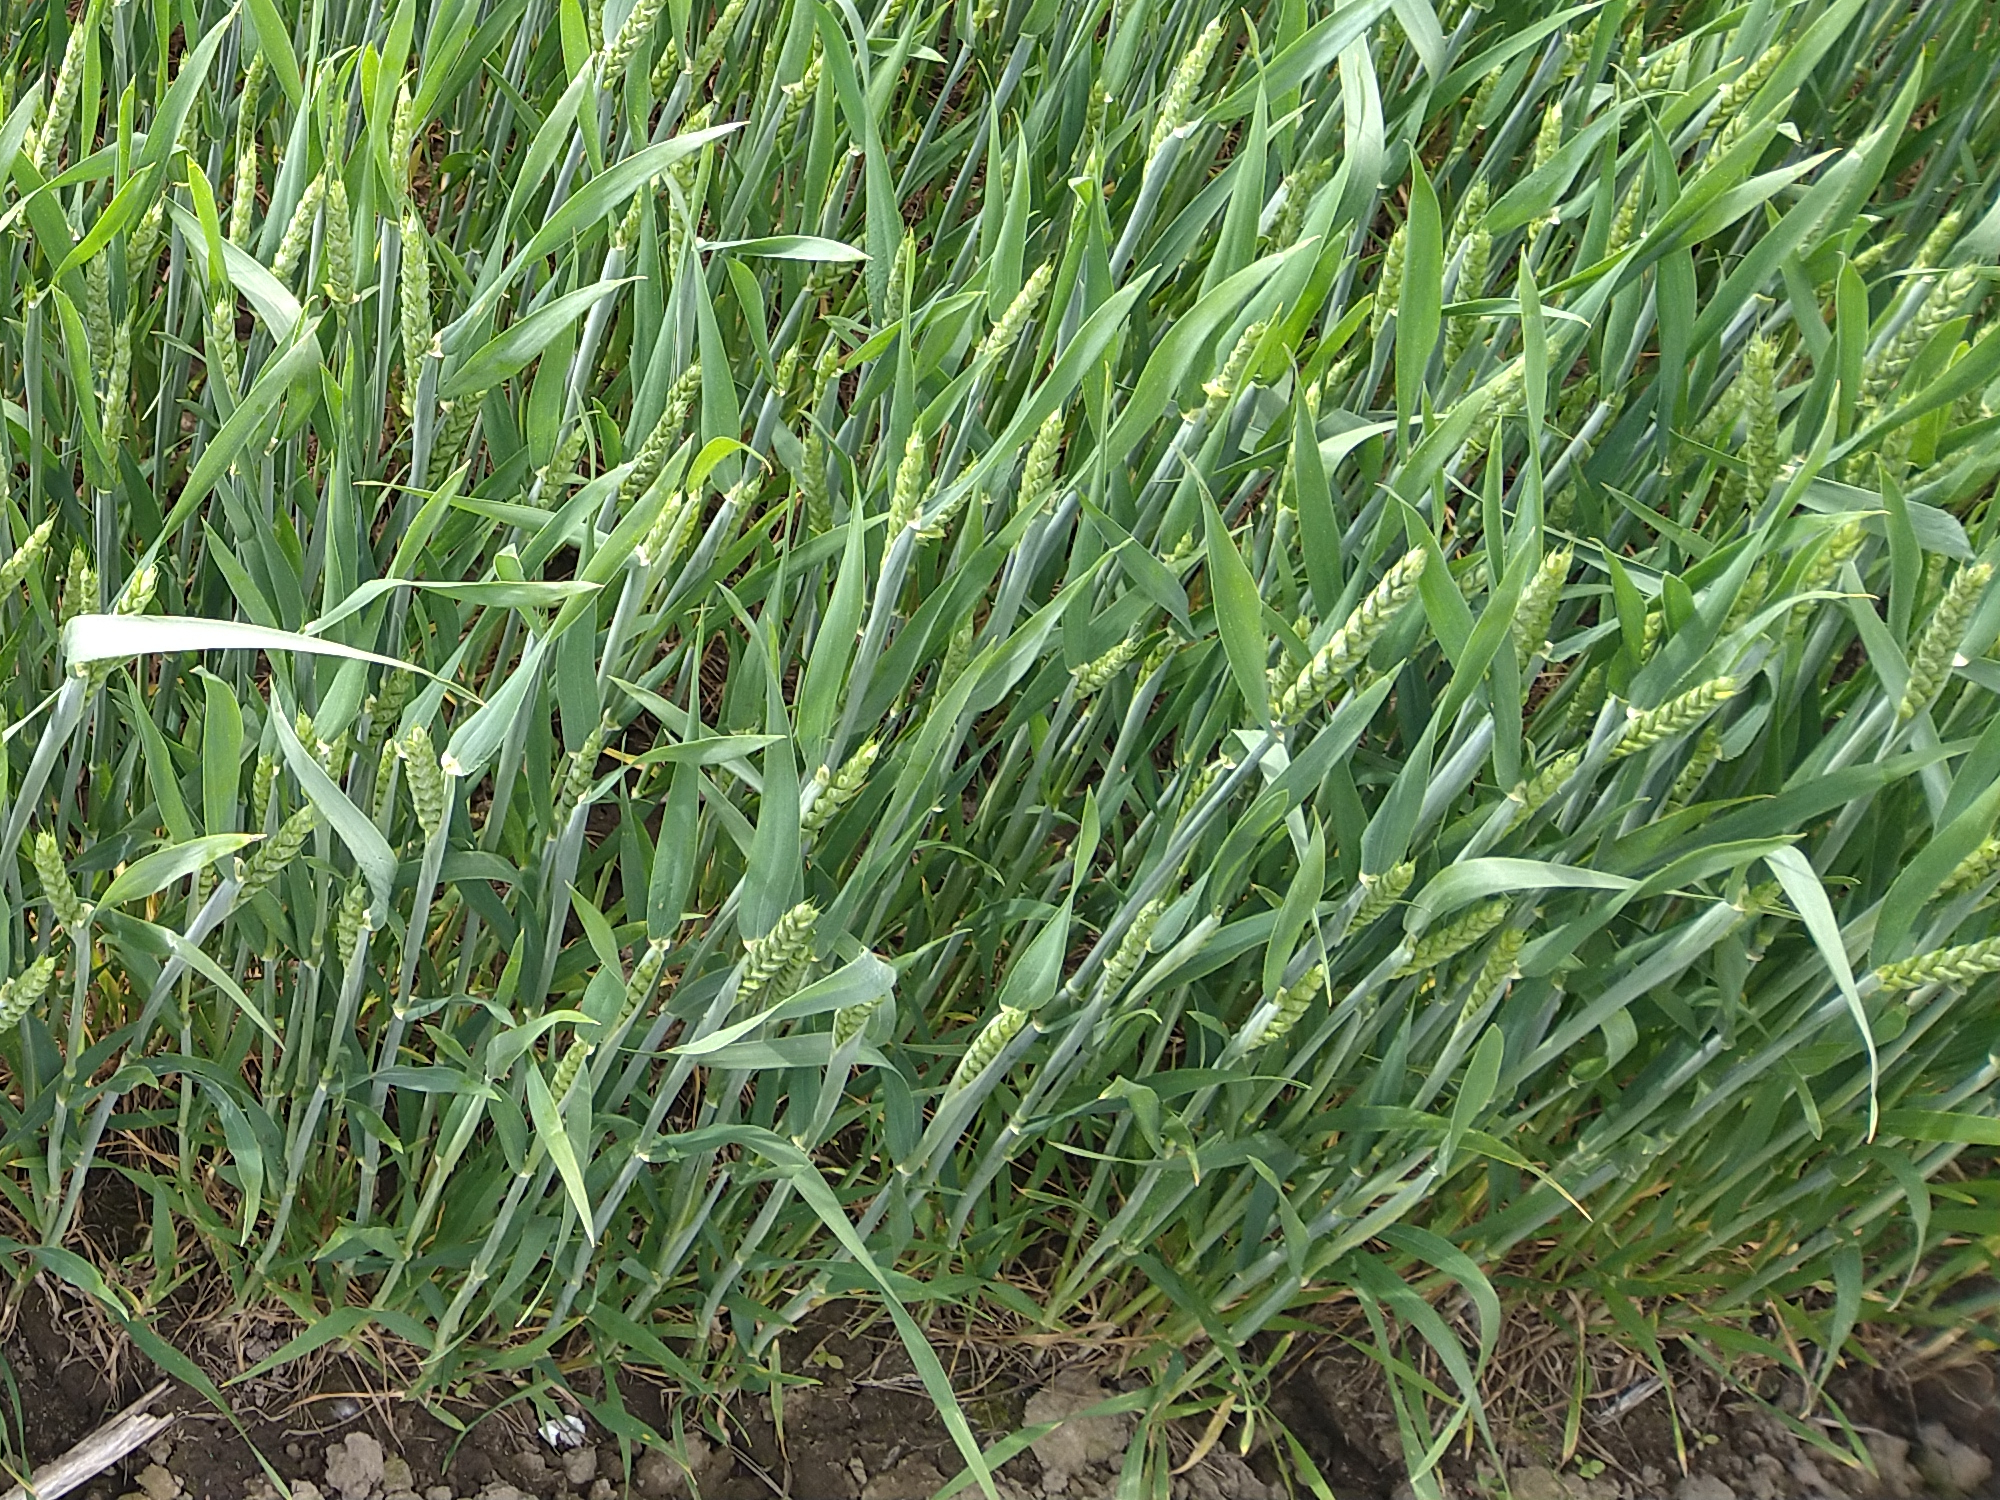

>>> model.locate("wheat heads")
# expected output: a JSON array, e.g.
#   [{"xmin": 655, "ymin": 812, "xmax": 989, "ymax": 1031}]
[
  {"xmin": 595, "ymin": 0, "xmax": 701, "ymax": 83},
  {"xmin": 234, "ymin": 804, "xmax": 312, "ymax": 911},
  {"xmin": 774, "ymin": 341, "xmax": 798, "ymax": 398},
  {"xmin": 338, "ymin": 866, "xmax": 372, "ymax": 955},
  {"xmin": 1701, "ymin": 111, "xmax": 1749, "ymax": 172},
  {"xmin": 1451, "ymin": 556, "xmax": 1491, "ymax": 606},
  {"xmin": 328, "ymin": 104, "xmax": 349, "ymax": 173},
  {"xmin": 701, "ymin": 0, "xmax": 746, "ymax": 78},
  {"xmin": 81, "ymin": 0, "xmax": 113, "ymax": 35},
  {"xmin": 613, "ymin": 407, "xmax": 682, "ymax": 511},
  {"xmin": 1104, "ymin": 900, "xmax": 1168, "ymax": 1001},
  {"xmin": 1449, "ymin": 229, "xmax": 1492, "ymax": 373},
  {"xmin": 949, "ymin": 1008, "xmax": 1027, "ymax": 1098},
  {"xmin": 715, "ymin": 476, "xmax": 760, "ymax": 567},
  {"xmin": 34, "ymin": 14, "xmax": 84, "ymax": 195},
  {"xmin": 768, "ymin": 949, "xmax": 809, "ymax": 1014},
  {"xmin": 1450, "ymin": 67, "xmax": 1500, "ymax": 165},
  {"xmin": 735, "ymin": 903, "xmax": 816, "ymax": 1006},
  {"xmin": 885, "ymin": 238, "xmax": 909, "ymax": 328},
  {"xmin": 670, "ymin": 192, "xmax": 684, "ymax": 286},
  {"xmin": 1286, "ymin": 377, "xmax": 1320, "ymax": 468},
  {"xmin": 253, "ymin": 759, "xmax": 270, "ymax": 834},
  {"xmin": 237, "ymin": 54, "xmax": 264, "ymax": 160},
  {"xmin": 584, "ymin": 0, "xmax": 607, "ymax": 61},
  {"xmin": 1180, "ymin": 764, "xmax": 1260, "ymax": 831},
  {"xmin": 1532, "ymin": 104, "xmax": 1562, "ymax": 231},
  {"xmin": 1325, "ymin": 351, "xmax": 1351, "ymax": 387},
  {"xmin": 1135, "ymin": 632, "xmax": 1175, "ymax": 701},
  {"xmin": 984, "ymin": 262, "xmax": 1052, "ymax": 359},
  {"xmin": 1744, "ymin": 338, "xmax": 1777, "ymax": 529},
  {"xmin": 1107, "ymin": 0, "xmax": 1146, "ymax": 43},
  {"xmin": 536, "ymin": 429, "xmax": 588, "ymax": 506},
  {"xmin": 58, "ymin": 550, "xmax": 87, "ymax": 628},
  {"xmin": 299, "ymin": 0, "xmax": 317, "ymax": 28},
  {"xmin": 1568, "ymin": 614, "xmax": 1674, "ymax": 729},
  {"xmin": 401, "ymin": 222, "xmax": 432, "ymax": 392},
  {"xmin": 803, "ymin": 436, "xmax": 830, "ymax": 533},
  {"xmin": 1608, "ymin": 43, "xmax": 1683, "ymax": 121},
  {"xmin": 1922, "ymin": 838, "xmax": 2000, "ymax": 904},
  {"xmin": 1648, "ymin": 740, "xmax": 1718, "ymax": 820},
  {"xmin": 775, "ymin": 58, "xmax": 827, "ymax": 133},
  {"xmin": 98, "ymin": 328, "xmax": 131, "ymax": 465},
  {"xmin": 91, "ymin": 566, "xmax": 161, "ymax": 671},
  {"xmin": 215, "ymin": 302, "xmax": 237, "ymax": 394},
  {"xmin": 811, "ymin": 0, "xmax": 887, "ymax": 52},
  {"xmin": 325, "ymin": 178, "xmax": 349, "ymax": 323},
  {"xmin": 1278, "ymin": 172, "xmax": 1319, "ymax": 256},
  {"xmin": 323, "ymin": 730, "xmax": 352, "ymax": 790},
  {"xmin": 975, "ymin": 0, "xmax": 1029, "ymax": 36},
  {"xmin": 366, "ymin": 665, "xmax": 416, "ymax": 736},
  {"xmin": 548, "ymin": 1043, "xmax": 587, "ymax": 1109},
  {"xmin": 1209, "ymin": 322, "xmax": 1263, "ymax": 409},
  {"xmin": 1857, "ymin": 276, "xmax": 1983, "ymax": 406},
  {"xmin": 1281, "ymin": 552, "xmax": 1428, "ymax": 720},
  {"xmin": 1373, "ymin": 223, "xmax": 1414, "ymax": 332},
  {"xmin": 295, "ymin": 714, "xmax": 322, "ymax": 771},
  {"xmin": 1613, "ymin": 158, "xmax": 1649, "ymax": 251},
  {"xmin": 616, "ymin": 180, "xmax": 646, "ymax": 244},
  {"xmin": 1574, "ymin": 0, "xmax": 1653, "ymax": 61},
  {"xmin": 1454, "ymin": 930, "xmax": 1520, "ymax": 1037},
  {"xmin": 1899, "ymin": 568, "xmax": 1996, "ymax": 717},
  {"xmin": 399, "ymin": 736, "xmax": 444, "ymax": 836},
  {"xmin": 763, "ymin": 42, "xmax": 775, "ymax": 102},
  {"xmin": 637, "ymin": 491, "xmax": 680, "ymax": 563},
  {"xmin": 555, "ymin": 726, "xmax": 608, "ymax": 826},
  {"xmin": 882, "ymin": 0, "xmax": 930, "ymax": 43},
  {"xmin": 811, "ymin": 340, "xmax": 841, "ymax": 420},
  {"xmin": 1840, "ymin": 395, "xmax": 1907, "ymax": 483},
  {"xmin": 1701, "ymin": 46, "xmax": 1788, "ymax": 134},
  {"xmin": 81, "ymin": 571, "xmax": 101, "ymax": 619},
  {"xmin": 613, "ymin": 949, "xmax": 664, "ymax": 1032},
  {"xmin": 1524, "ymin": 754, "xmax": 1579, "ymax": 814},
  {"xmin": 1712, "ymin": 449, "xmax": 1748, "ymax": 524},
  {"xmin": 662, "ymin": 490, "xmax": 703, "ymax": 570},
  {"xmin": 124, "ymin": 203, "xmax": 166, "ymax": 299},
  {"xmin": 1509, "ymin": 552, "xmax": 1573, "ymax": 676},
  {"xmin": 1725, "ymin": 563, "xmax": 1768, "ymax": 628},
  {"xmin": 645, "ymin": 36, "xmax": 681, "ymax": 99},
  {"xmin": 666, "ymin": 359, "xmax": 701, "ymax": 414},
  {"xmin": 1394, "ymin": 897, "xmax": 1507, "ymax": 982},
  {"xmin": 273, "ymin": 176, "xmax": 325, "ymax": 287},
  {"xmin": 827, "ymin": 147, "xmax": 852, "ymax": 211},
  {"xmin": 1605, "ymin": 681, "xmax": 1747, "ymax": 754},
  {"xmin": 1451, "ymin": 180, "xmax": 1489, "ymax": 250},
  {"xmin": 195, "ymin": 863, "xmax": 215, "ymax": 910},
  {"xmin": 31, "ymin": 834, "xmax": 80, "ymax": 940},
  {"xmin": 836, "ymin": 995, "xmax": 874, "ymax": 1051},
  {"xmin": 1871, "ymin": 938, "xmax": 2000, "ymax": 985},
  {"xmin": 1904, "ymin": 213, "xmax": 1960, "ymax": 297},
  {"xmin": 1086, "ymin": 74, "xmax": 1117, "ymax": 142},
  {"xmin": 799, "ymin": 743, "xmax": 881, "ymax": 854},
  {"xmin": 889, "ymin": 432, "xmax": 923, "ymax": 539},
  {"xmin": 670, "ymin": 104, "xmax": 712, "ymax": 188},
  {"xmin": 1261, "ymin": 969, "xmax": 1325, "ymax": 1048},
  {"xmin": 228, "ymin": 144, "xmax": 251, "ymax": 249},
  {"xmin": 1150, "ymin": 12, "xmax": 1222, "ymax": 163},
  {"xmin": 0, "ymin": 520, "xmax": 51, "ymax": 600},
  {"xmin": 388, "ymin": 88, "xmax": 412, "ymax": 197},
  {"xmin": 939, "ymin": 631, "xmax": 968, "ymax": 708},
  {"xmin": 1075, "ymin": 625, "xmax": 1148, "ymax": 697},
  {"xmin": 1022, "ymin": 408, "xmax": 1062, "ymax": 514},
  {"xmin": 372, "ymin": 741, "xmax": 393, "ymax": 825},
  {"xmin": 86, "ymin": 243, "xmax": 108, "ymax": 386},
  {"xmin": 421, "ymin": 386, "xmax": 487, "ymax": 477},
  {"xmin": 1789, "ymin": 521, "xmax": 1867, "ymax": 646},
  {"xmin": 0, "ymin": 955, "xmax": 49, "ymax": 1037},
  {"xmin": 1339, "ymin": 861, "xmax": 1413, "ymax": 942}
]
